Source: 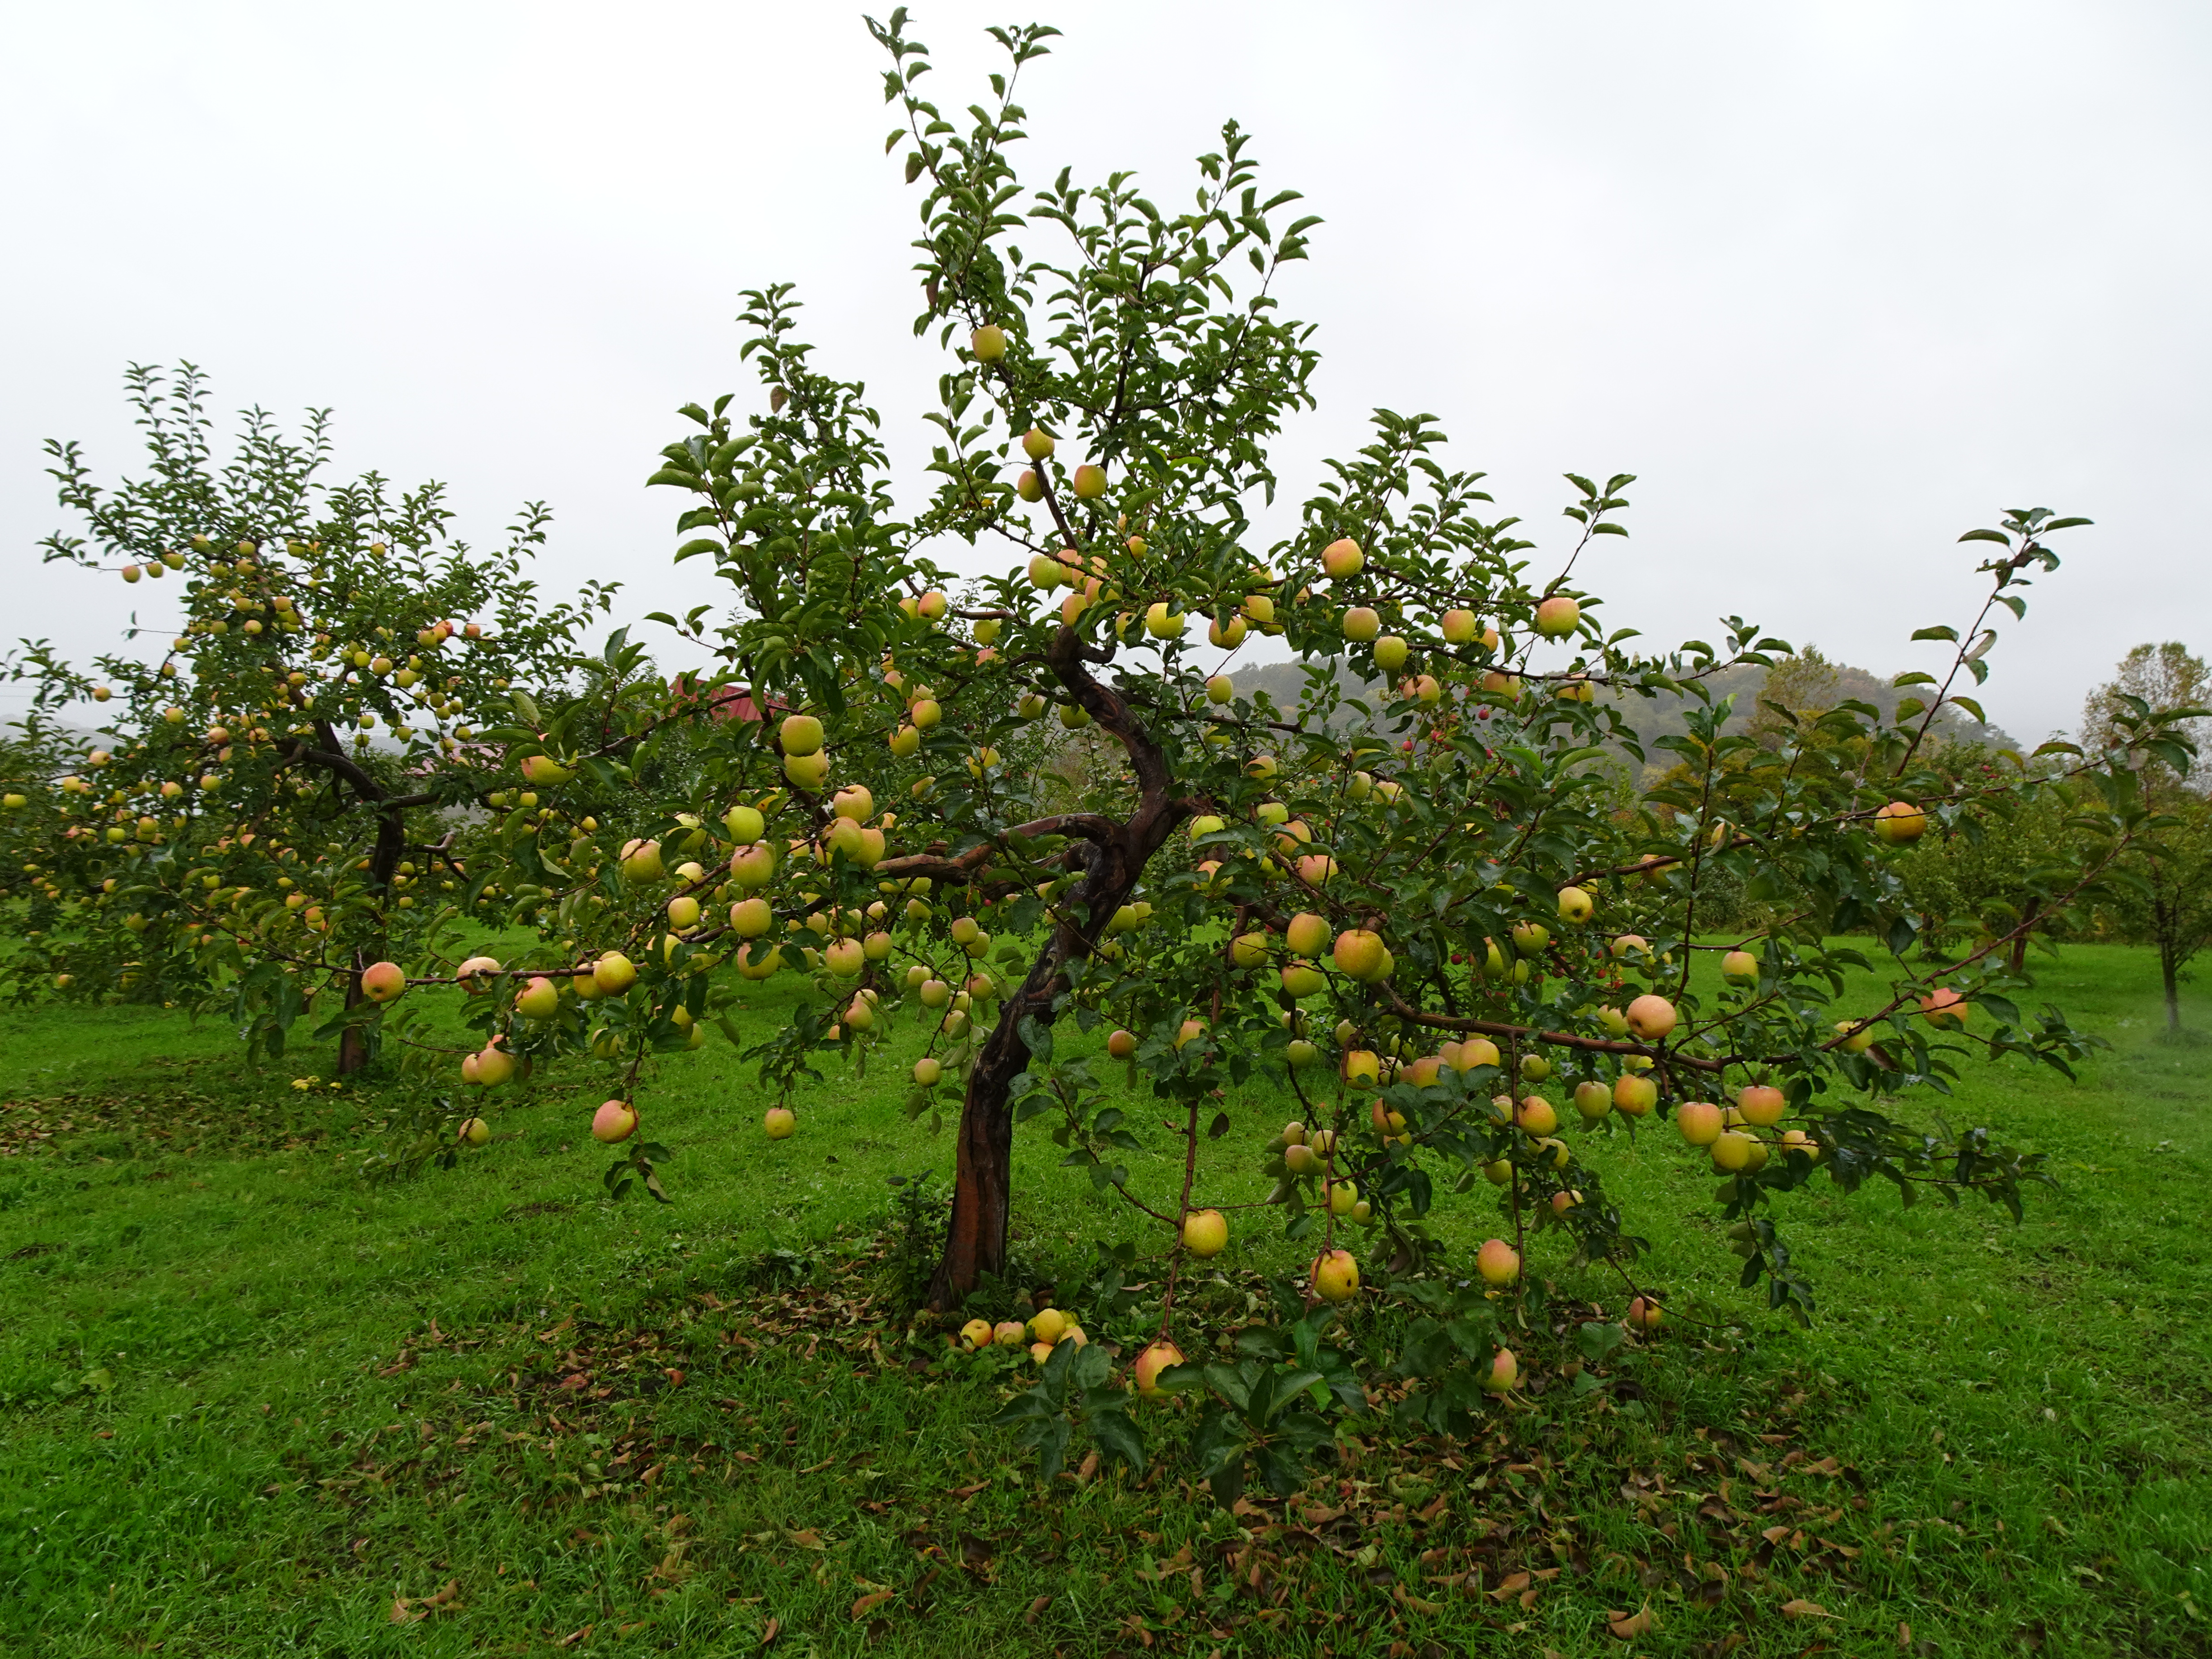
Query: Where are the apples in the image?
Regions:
[1203,725,1231,751]
[653,1000,693,1030]
[1018,470,1048,502]
[1484,672,1520,701]
[1612,935,1648,967]
[826,938,865,978]
[1613,1074,1657,1118]
[1351,1201,1377,1227]
[1574,1081,1612,1119]
[734,839,776,866]
[1739,1133,1768,1176]
[1277,820,1311,859]
[1257,803,1288,824]
[521,733,578,787]
[1240,595,1274,630]
[1781,1130,1819,1163]
[1307,753,1331,773]
[730,846,773,891]
[1477,1239,1520,1286]
[822,816,863,860]
[1711,821,1751,847]
[1130,902,1153,928]
[956,647,970,662]
[1287,1039,1316,1068]
[1403,675,1440,713]
[730,898,771,937]
[1390,1033,1416,1064]
[666,813,707,854]
[1146,603,1184,640]
[1438,1041,1462,1071]
[691,945,718,975]
[1469,937,1504,979]
[914,1058,941,1088]
[800,948,819,971]
[1552,1190,1584,1220]
[1721,951,1758,987]
[714,879,744,906]
[1710,1129,1750,1171]
[1022,427,1055,461]
[1085,574,1120,608]
[457,957,502,995]
[864,931,893,960]
[828,1024,840,1040]
[1283,1121,1311,1147]
[1487,1100,1513,1127]
[765,1108,795,1140]
[1060,703,1090,730]
[1641,945,1672,972]
[942,1010,966,1035]
[592,1100,639,1144]
[1028,555,1062,590]
[1365,947,1394,985]
[889,724,920,757]
[1019,693,1046,721]
[1190,815,1224,845]
[1045,904,1060,924]
[486,1034,510,1049]
[853,989,878,1011]
[1639,854,1682,889]
[1194,860,1233,892]
[1375,1056,1403,1087]
[1921,987,1968,1022]
[1874,802,1925,848]
[853,909,862,924]
[912,777,938,802]
[1484,1159,1512,1186]
[906,684,936,710]
[1334,930,1384,980]
[849,829,885,869]
[1205,675,1233,705]
[1305,1148,1328,1175]
[1108,1030,1136,1060]
[593,955,636,997]
[1175,1021,1208,1051]
[1267,856,1290,881]
[573,961,607,1002]
[912,700,941,731]
[1495,880,1515,895]
[1122,535,1148,559]
[1557,887,1593,925]
[1266,621,1284,634]
[790,872,821,905]
[669,926,678,935]
[1352,748,1381,768]
[1623,1055,1653,1077]
[620,838,664,885]
[1738,1085,1784,1128]
[1537,1139,1569,1171]
[973,618,1001,645]
[1304,594,1336,617]
[1037,881,1060,903]
[1325,613,1344,636]
[1116,612,1146,642]
[1465,823,1483,835]
[776,940,793,969]
[991,647,1005,664]
[1287,913,1332,958]
[1244,755,1277,790]
[1074,465,1107,499]
[361,962,405,1003]
[1342,607,1380,643]
[917,592,947,621]
[1537,597,1580,636]
[879,878,911,894]
[920,980,949,1009]
[784,748,828,788]
[1520,1054,1550,1083]
[1340,1050,1379,1090]
[738,941,779,980]
[965,932,989,959]
[675,862,704,891]
[875,813,902,832]
[1466,1032,1492,1041]
[1374,1002,1397,1024]
[1471,627,1498,653]
[1233,932,1269,970]
[1118,513,1143,535]
[1383,1132,1412,1149]
[1411,1055,1449,1089]
[1295,855,1338,889]
[1312,1130,1338,1160]
[1056,549,1079,582]
[1457,1039,1500,1083]
[1182,1209,1227,1259]
[1250,565,1273,593]
[1561,991,1590,1018]
[1281,960,1322,999]
[592,1028,621,1061]
[668,897,700,930]
[680,1023,704,1050]
[1209,616,1247,650]
[1720,1107,1749,1133]
[1596,1004,1628,1039]
[906,897,932,923]
[1517,1096,1557,1137]
[898,598,919,618]
[1311,1249,1359,1303]
[967,747,1000,779]
[646,934,683,971]
[1525,1135,1549,1158]
[459,1118,489,1148]
[711,815,735,851]
[882,670,906,699]
[1062,594,1089,625]
[1577,878,1598,895]
[1135,1342,1184,1398]
[1320,1178,1358,1216]
[1374,636,1407,670]
[1372,1097,1407,1137]
[1373,594,1403,625]
[1630,1296,1661,1330]
[1347,771,1371,798]
[1626,995,1676,1041]
[1502,959,1528,987]
[780,715,824,757]
[1109,905,1138,932]
[907,966,931,989]
[678,925,699,940]
[1322,538,1364,579]
[951,917,979,946]
[1072,555,1108,592]
[976,649,997,667]
[475,1048,516,1087]
[815,840,833,866]
[630,920,654,944]
[908,877,932,895]
[1101,938,1123,959]
[598,951,624,961]
[833,785,873,824]
[1678,1102,1724,1146]
[788,912,827,939]
[1335,1019,1363,1050]
[1295,587,1311,604]
[1244,848,1276,878]
[842,1001,873,1032]
[514,977,558,1020]
[1556,673,1594,704]
[755,787,780,812]
[972,325,1006,362]
[1442,609,1475,645]
[1372,781,1404,805]
[1076,987,1100,995]
[1832,1020,1872,1052]
[966,973,994,1002]
[725,806,764,846]
[881,654,894,673]
[948,991,973,1014]
[1512,920,1549,956]
[1491,1095,1513,1104]
[1400,1065,1414,1084]
[1476,1344,1517,1392]
[1281,1008,1312,1037]
[827,906,856,938]
[786,839,810,858]
[461,1054,481,1083]
[867,901,888,922]
[1285,1145,1313,1174]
